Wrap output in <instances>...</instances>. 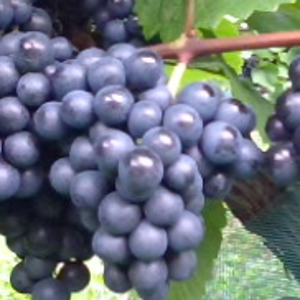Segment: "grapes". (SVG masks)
Here are the masks:
<instances>
[{"mask_svg":"<svg viewBox=\"0 0 300 300\" xmlns=\"http://www.w3.org/2000/svg\"><path fill=\"white\" fill-rule=\"evenodd\" d=\"M163 67L152 45L81 52L39 4L0 0V234L24 262L17 292L69 300L96 253L111 291L164 300L198 269L205 197L261 168L278 189L300 175V56L264 153L251 103L209 80L173 92Z\"/></svg>","mask_w":300,"mask_h":300,"instance_id":"obj_1","label":"grapes"}]
</instances>
